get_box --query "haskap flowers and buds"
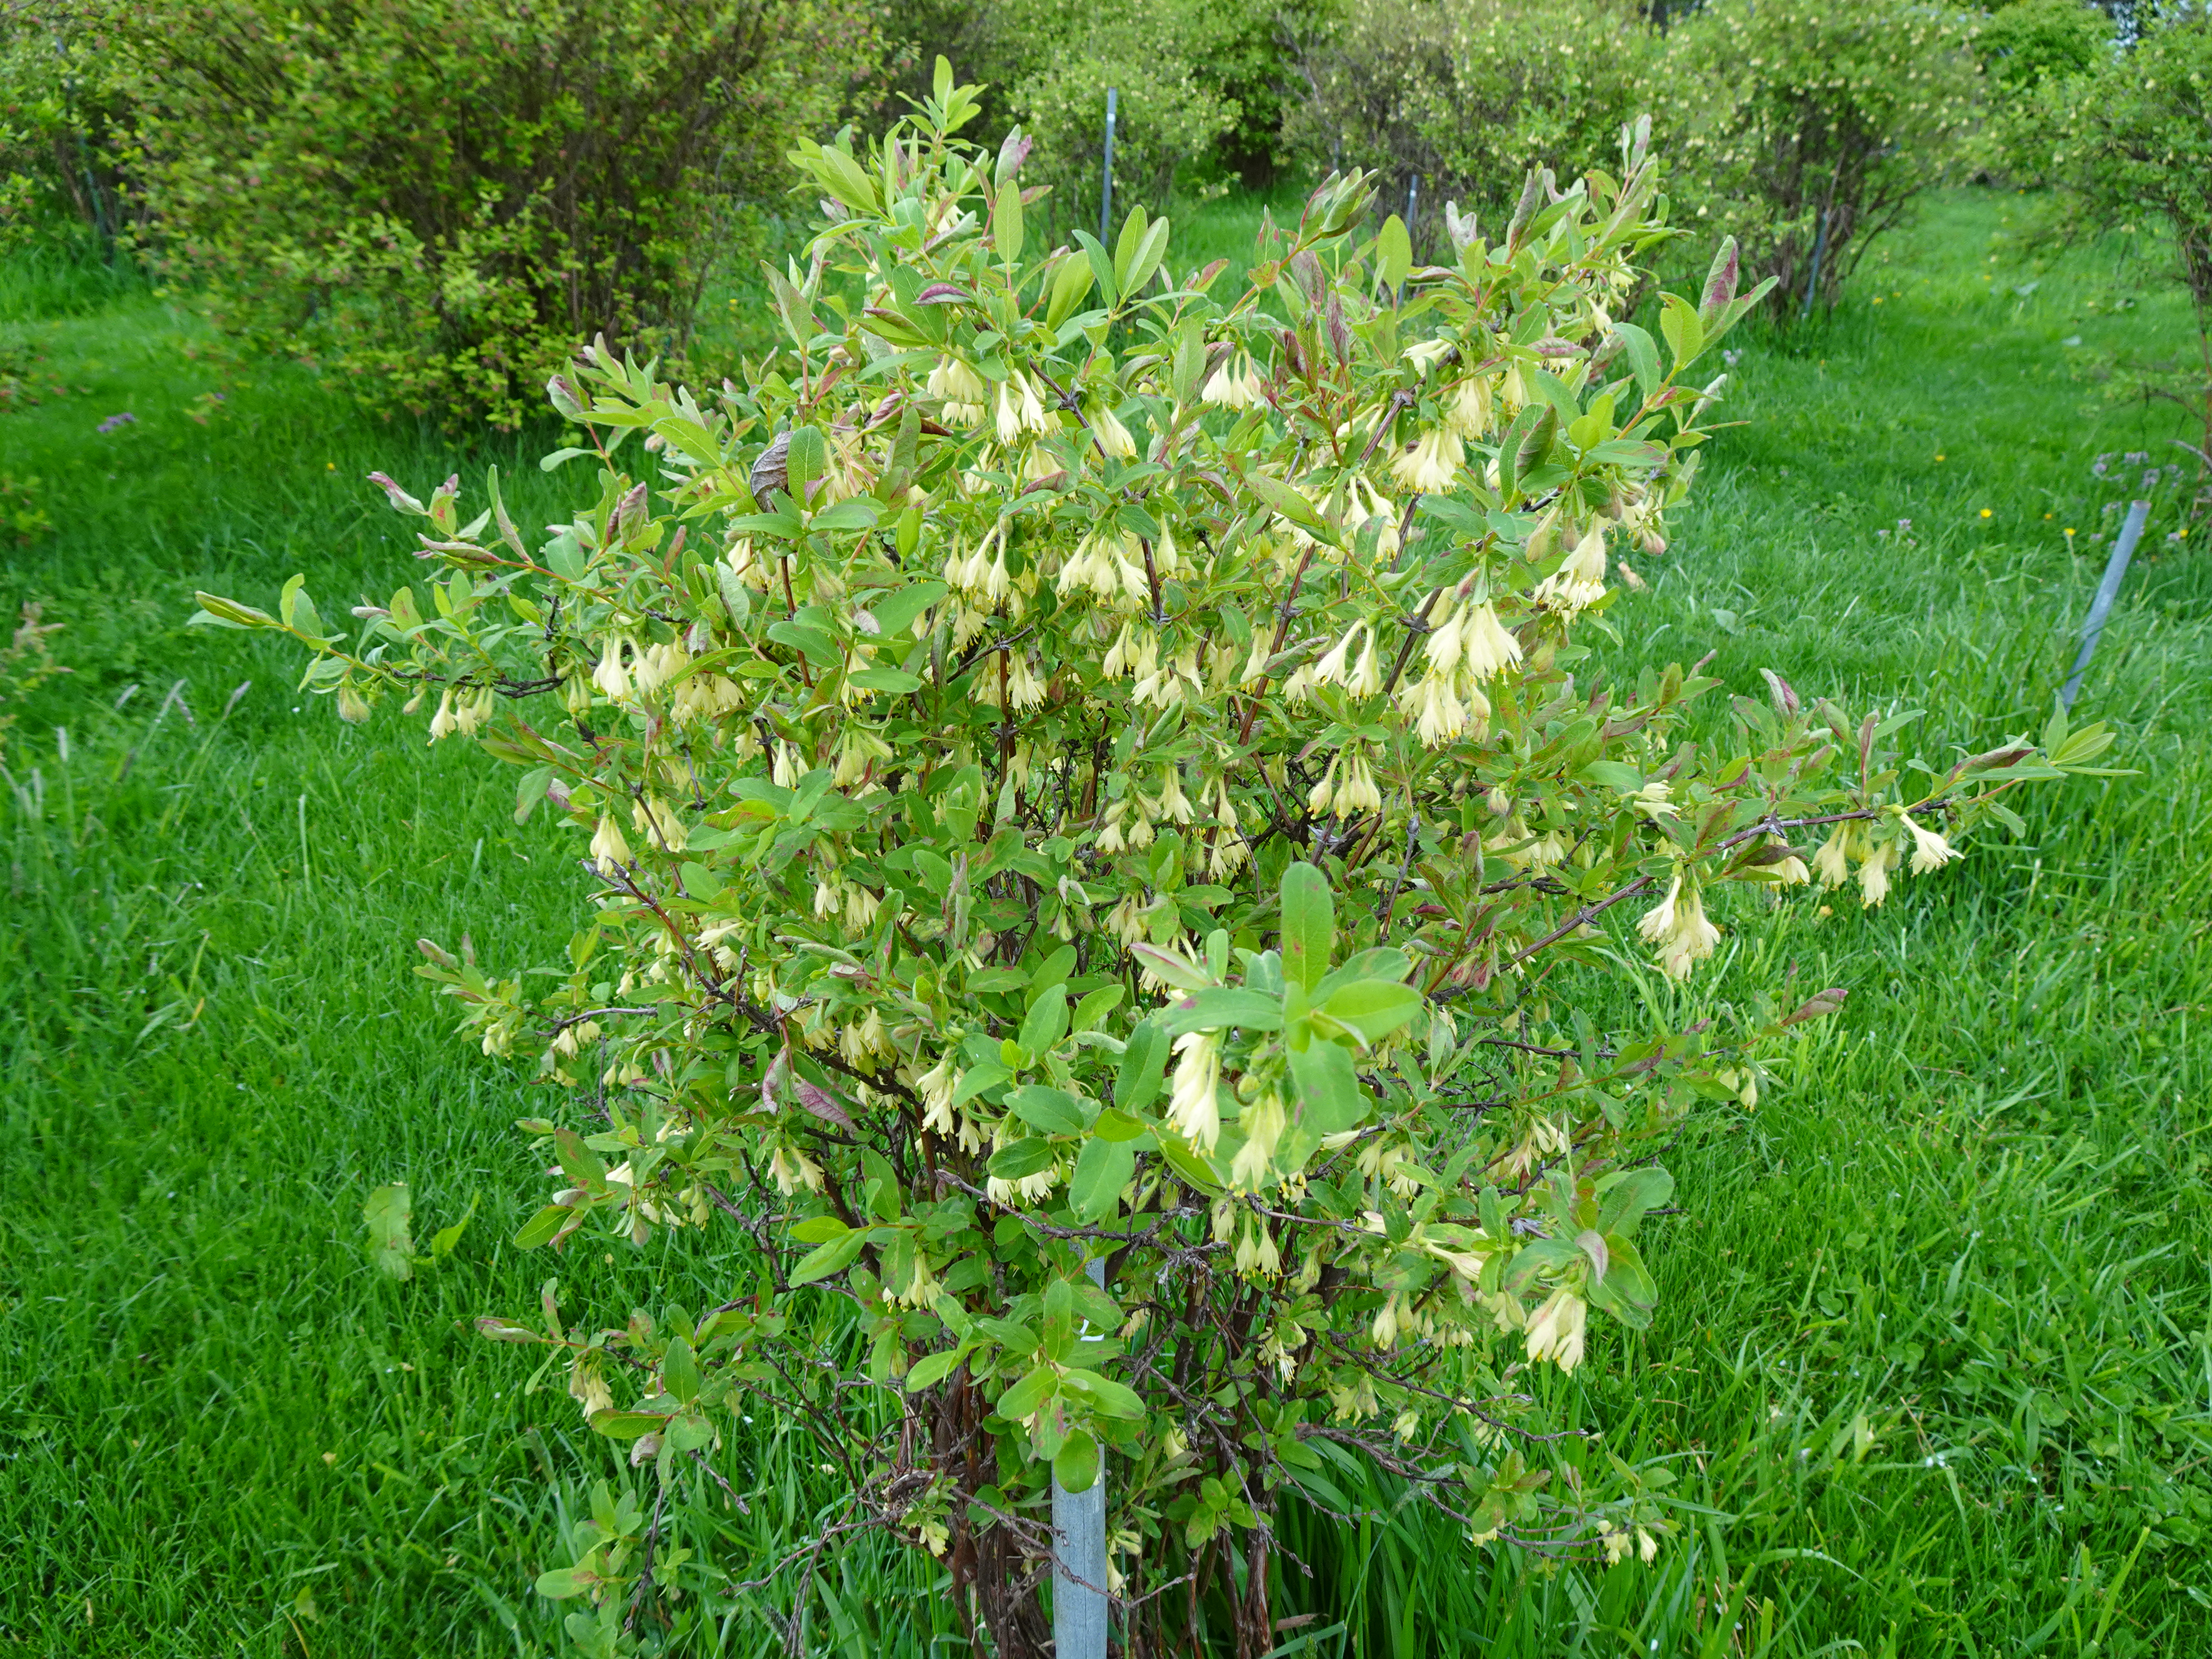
[661,643,686,677]
[980,674,1002,704]
[1290,1323,1309,1348]
[1775,835,1812,889]
[658,803,684,840]
[592,818,608,857]
[1301,1246,1323,1284]
[729,536,757,583]
[1340,755,1376,815]
[1548,1293,1590,1377]
[1437,674,1468,740]
[715,931,746,968]
[1604,1541,1624,1563]
[949,358,984,403]
[1152,665,1185,714]
[942,528,969,590]
[1500,1007,1526,1032]
[402,686,428,717]
[1101,890,1132,934]
[963,599,985,630]
[931,792,945,823]
[1095,404,1138,461]
[339,693,357,721]
[1118,1538,1141,1556]
[859,779,880,796]
[1266,1095,1308,1196]
[1638,871,1684,943]
[1610,492,1645,538]
[1466,377,1494,439]
[983,533,1013,604]
[554,1023,577,1056]
[1738,1072,1764,1110]
[839,648,877,702]
[936,180,967,226]
[1530,564,1581,604]
[1222,745,1240,767]
[859,1004,891,1061]
[631,798,651,833]
[1402,429,1441,492]
[713,675,746,704]
[1002,456,1018,496]
[455,702,482,735]
[1639,491,1658,527]
[1210,775,1238,828]
[911,1260,926,1312]
[595,824,621,876]
[1055,529,1093,595]
[1398,668,1435,719]
[1118,622,1154,688]
[735,721,761,762]
[1426,1237,1492,1282]
[1018,448,1056,522]
[1485,597,1522,674]
[865,731,895,763]
[1414,581,1459,627]
[1540,1117,1569,1157]
[1212,645,1232,686]
[919,1275,945,1306]
[1093,816,1125,855]
[928,1531,952,1555]
[1214,832,1242,871]
[1545,357,1575,372]
[1537,828,1567,866]
[985,637,1011,674]
[1171,400,1185,424]
[815,875,845,919]
[1855,838,1891,910]
[1374,1043,1390,1070]
[1222,353,1260,412]
[942,398,968,426]
[1173,535,1201,584]
[1425,598,1470,674]
[482,687,497,723]
[1295,491,1337,547]
[1145,413,1162,433]
[592,634,626,700]
[1605,248,1641,293]
[1846,828,1863,860]
[1017,1138,1062,1203]
[1233,1210,1257,1276]
[1592,837,1617,894]
[1244,797,1263,827]
[1167,1031,1221,1149]
[469,685,489,720]
[1636,1529,1658,1563]
[609,819,630,865]
[864,890,888,924]
[1369,1286,1403,1352]
[1374,519,1401,559]
[577,675,593,710]
[1353,755,1384,814]
[1163,1431,1179,1460]
[844,890,870,930]
[1238,623,1272,685]
[1215,743,1230,768]
[1514,813,1542,862]
[963,392,985,427]
[1131,1308,1152,1324]
[1312,619,1356,688]
[583,1373,614,1423]
[1413,429,1448,495]
[1238,350,1271,408]
[571,1365,586,1397]
[1436,425,1465,474]
[1016,650,1047,711]
[697,918,745,947]
[1140,943,1170,991]
[1904,814,1958,868]
[1859,830,1877,863]
[874,1071,903,1106]
[1138,792,1162,823]
[1652,730,1668,751]
[1018,371,1050,433]
[1805,821,1843,873]
[1105,796,1132,823]
[1658,895,1708,982]
[1100,618,1133,681]
[1027,368,1067,437]
[918,1068,956,1136]
[689,674,714,713]
[1305,752,1341,819]
[1120,1529,1142,1541]
[854,1079,880,1105]
[958,527,990,593]
[773,735,793,795]
[1510,1127,1538,1172]
[1467,679,1492,740]
[1257,1327,1280,1365]
[1336,1384,1364,1420]
[962,955,976,973]
[1400,333,1464,375]
[816,441,848,503]
[1116,535,1153,603]
[628,637,658,693]
[1654,487,1665,524]
[1155,515,1182,573]
[620,1064,632,1085]
[1004,738,1035,797]
[1813,824,1851,891]
[1366,407,1385,439]
[1397,1290,1416,1333]
[1266,532,1298,584]
[615,971,635,1000]
[1087,535,1119,600]
[964,443,995,494]
[973,774,989,819]
[1138,660,1177,713]
[663,1200,688,1228]
[1177,647,1206,702]
[352,692,374,723]
[566,676,584,716]
[1395,1417,1419,1442]
[575,1019,598,1043]
[987,1127,1017,1209]
[1253,1218,1286,1275]
[1164,762,1200,826]
[1106,1559,1126,1599]
[1471,603,1498,679]
[841,1019,869,1062]
[810,564,836,599]
[1008,650,1037,711]
[827,436,880,495]
[1353,472,1392,520]
[926,353,954,399]
[426,688,456,742]
[1452,371,1477,425]
[1391,1150,1422,1198]
[1404,672,1441,742]
[751,971,771,1006]
[882,1273,912,1313]
[969,522,1004,597]
[1341,478,1372,531]
[1419,1310,1437,1339]
[816,561,847,594]
[1352,1130,1394,1176]
[1129,632,1167,709]
[651,953,669,980]
[1573,576,1607,614]
[689,1190,709,1225]
[915,1051,954,1095]
[1122,1164,1162,1216]
[972,951,983,969]
[1473,1521,1501,1545]
[1523,1288,1570,1365]
[762,1147,797,1193]
[1461,1331,1474,1347]
[645,796,666,847]
[604,1156,641,1208]
[1722,1066,1740,1093]
[1212,1196,1239,1236]
[1484,822,1510,860]
[1583,297,1613,339]
[1207,834,1225,879]
[955,1106,983,1157]
[948,594,976,649]
[1229,1094,1273,1194]
[604,1064,617,1085]
[1119,897,1143,955]
[1502,938,1529,979]
[1201,357,1235,409]
[1431,1322,1447,1353]
[993,373,1021,445]
[1272,1333,1297,1385]
[1621,779,1677,798]
[1121,1320,1136,1340]
[794,1002,839,1049]
[1502,363,1530,411]
[1280,659,1313,702]
[1129,801,1154,847]
[1365,476,1399,521]
[796,1151,830,1190]
[1563,518,1609,585]
[1170,1419,1189,1446]
[836,733,852,786]
[1311,1123,1371,1155]
[1622,801,1685,824]
[907,485,930,502]
[848,730,865,777]
[1685,879,1722,956]
[1273,756,1290,791]
[1348,624,1383,701]
[637,639,669,691]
